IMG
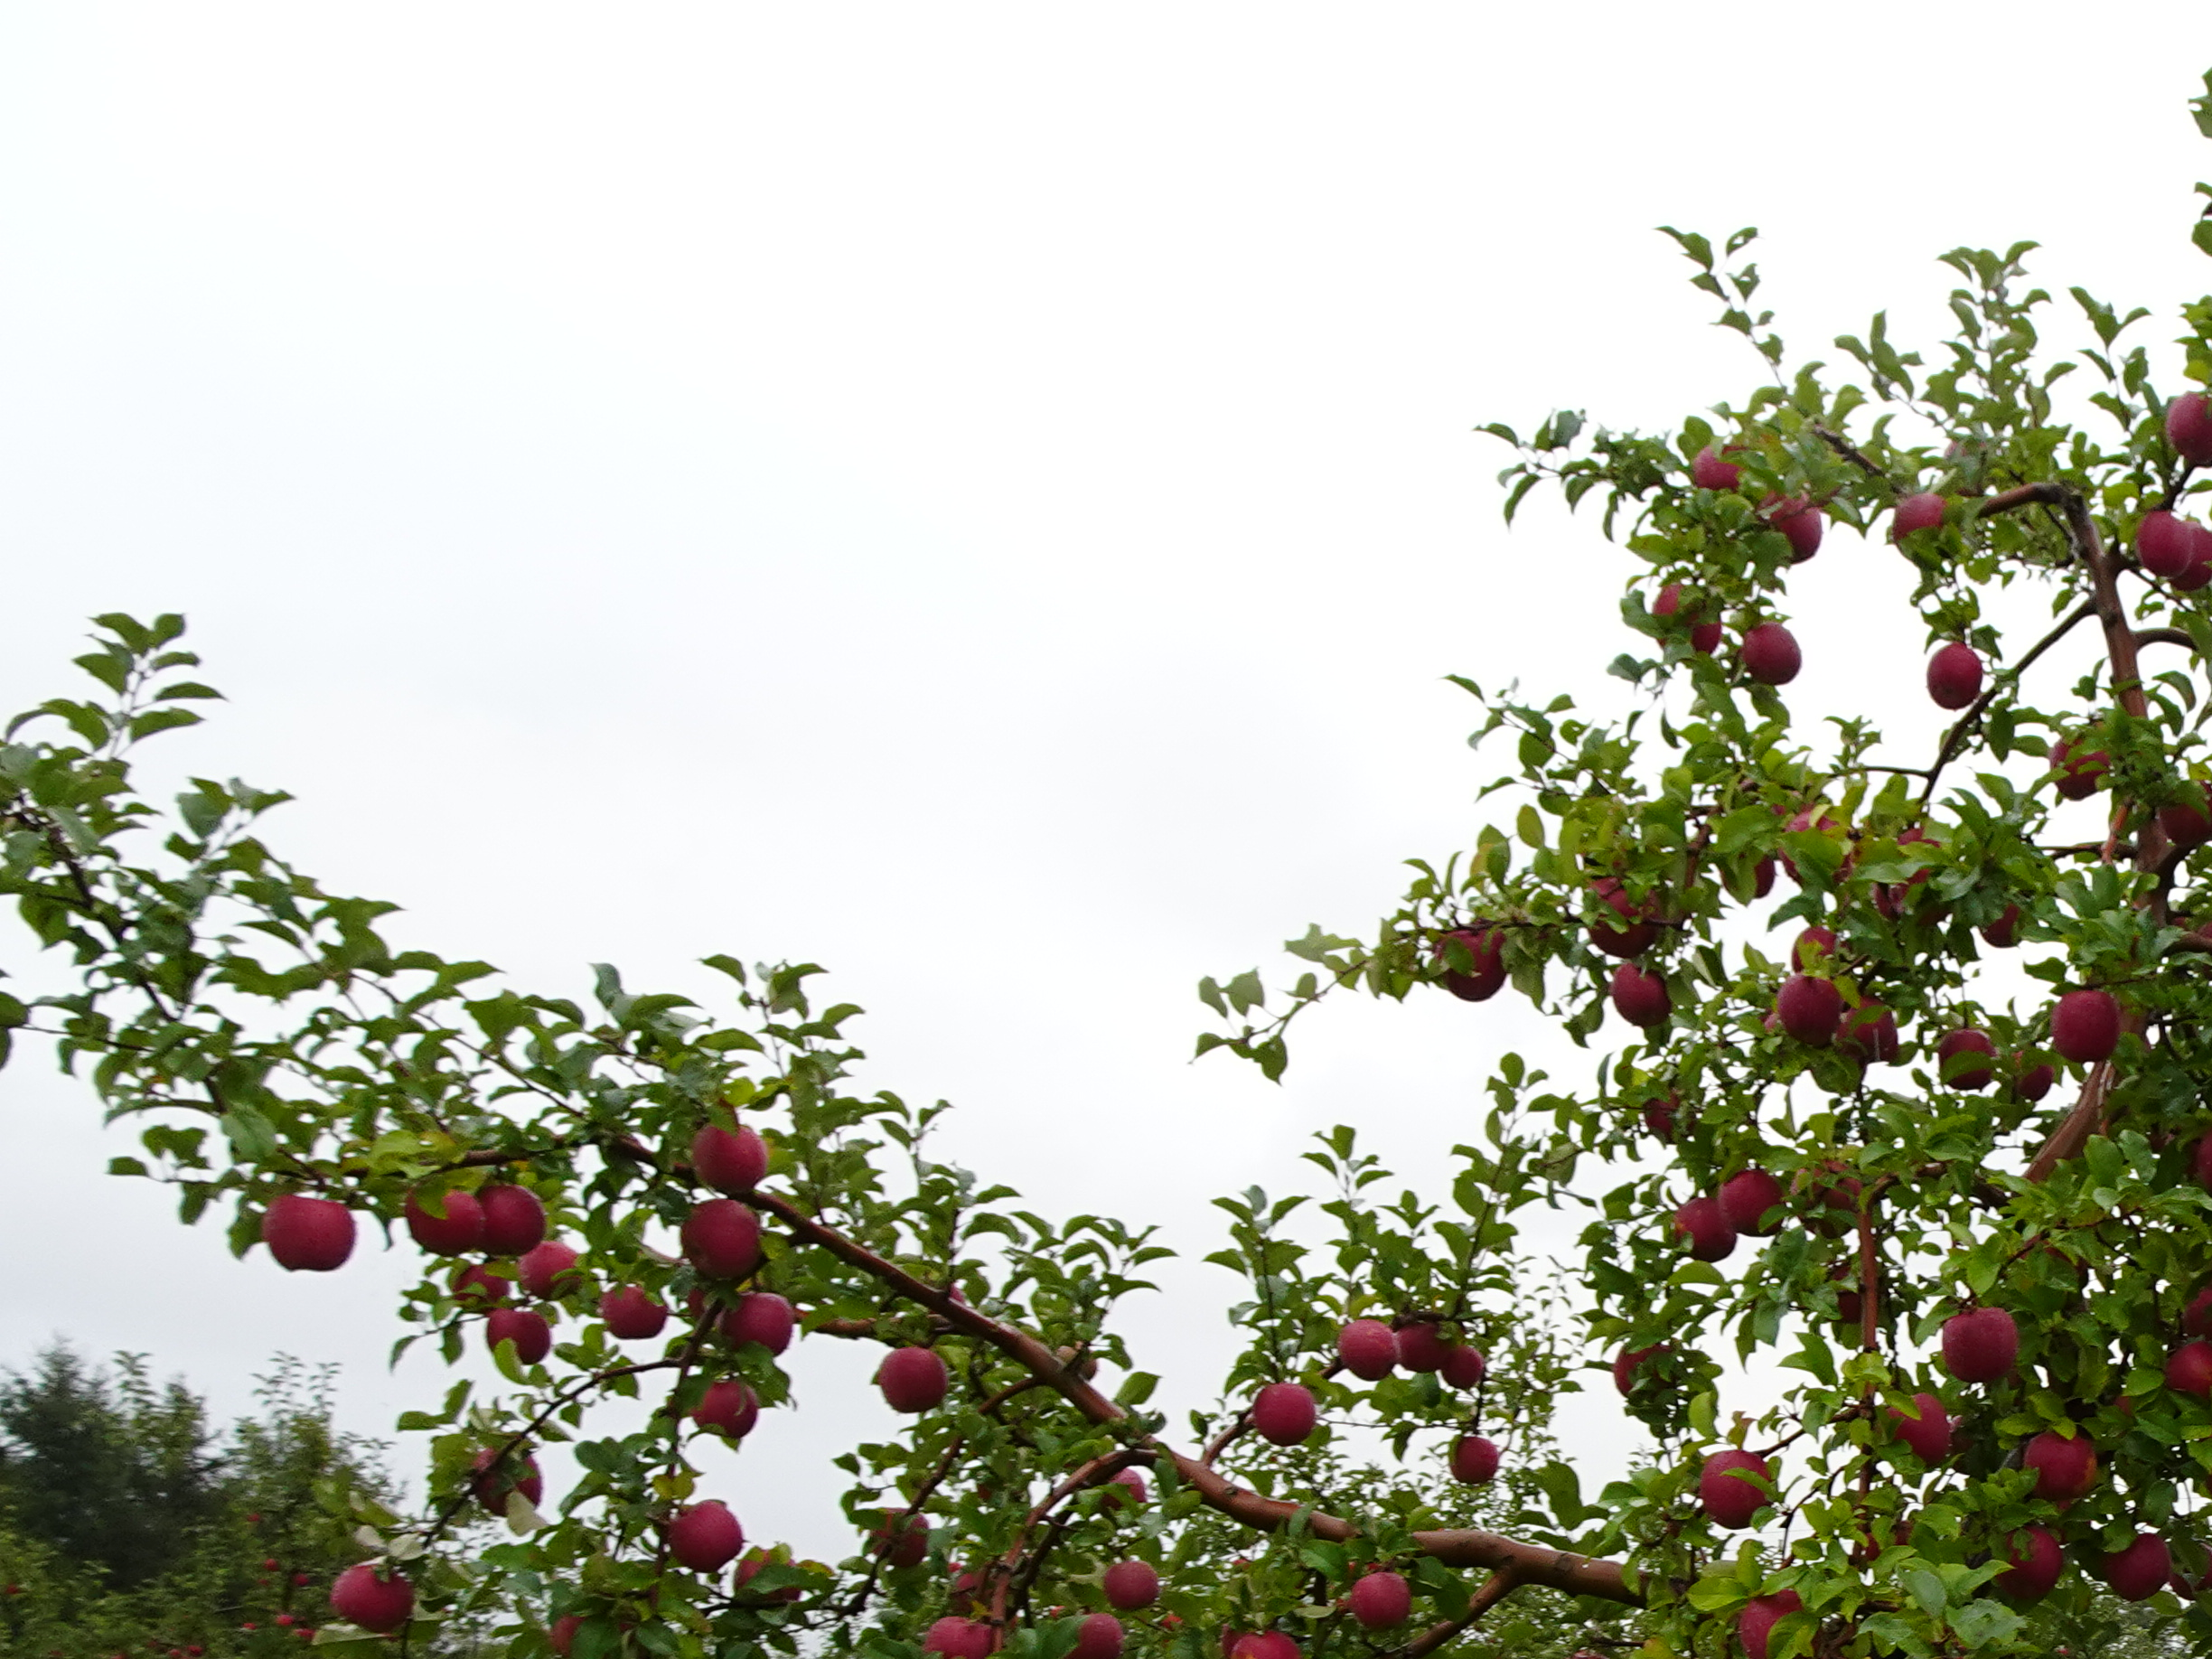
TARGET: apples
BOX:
[2114,1394,2136,1419]
[1744,624,1801,685]
[1928,642,1982,709]
[2104,1532,2170,1601]
[2052,990,2119,1063]
[1231,1630,1302,1659]
[880,1347,947,1413]
[872,1507,928,1568]
[1893,493,1946,561]
[1350,1572,1411,1632]
[1755,490,1821,563]
[2170,917,2191,930]
[679,1199,761,1280]
[2025,1432,2097,1502]
[1791,1159,1862,1238]
[471,1448,545,1517]
[1614,1343,1669,1397]
[1738,1589,1803,1659]
[2165,1341,2212,1400]
[1588,877,1661,958]
[686,1288,706,1322]
[2197,920,2212,970]
[405,1189,485,1256]
[1675,1197,1737,1263]
[1721,852,1775,898]
[1978,902,2022,947]
[2012,1051,2054,1102]
[948,1563,976,1591]
[2047,735,2111,801]
[453,1265,509,1304]
[520,1240,579,1300]
[1827,1265,1863,1324]
[1764,1013,1780,1030]
[2183,1287,2212,1341]
[1397,1321,1450,1373]
[1442,1346,1481,1388]
[550,1615,586,1659]
[733,1549,800,1601]
[1064,1613,1123,1659]
[1847,999,1894,1048]
[692,1123,769,1194]
[1105,1560,1158,1611]
[1439,929,1509,1002]
[332,1563,413,1633]
[1939,1030,1997,1090]
[265,1193,356,1272]
[1996,1525,2062,1598]
[1897,828,1941,848]
[1100,1468,1147,1510]
[977,1461,1013,1502]
[1875,868,1931,919]
[949,1284,965,1305]
[1451,1437,1497,1485]
[1222,1624,1248,1659]
[718,1291,794,1357]
[2161,779,2212,847]
[2045,1499,2090,1544]
[1652,584,1721,656]
[487,1309,550,1365]
[1834,1022,1852,1041]
[1338,1319,1397,1381]
[1864,1522,1913,1561]
[1880,1033,1897,1061]
[1700,1450,1775,1529]
[1781,811,1862,884]
[599,1286,667,1341]
[1645,1091,1679,1144]
[1057,1340,1100,1383]
[668,1501,742,1573]
[1875,1393,1950,1469]
[2174,529,2212,590]
[1943,1307,2017,1384]
[1253,1384,1315,1447]
[924,1617,1001,1659]
[474,1186,545,1256]
[1777,974,1841,1045]
[1612,963,1672,1027]
[1770,791,1814,814]
[1792,926,1845,973]
[1693,442,1745,495]
[2167,395,2212,463]
[2170,1551,2212,1600]
[2139,511,2193,577]
[692,1381,760,1438]
[1810,1040,1866,1079]
[1719,1169,1787,1237]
